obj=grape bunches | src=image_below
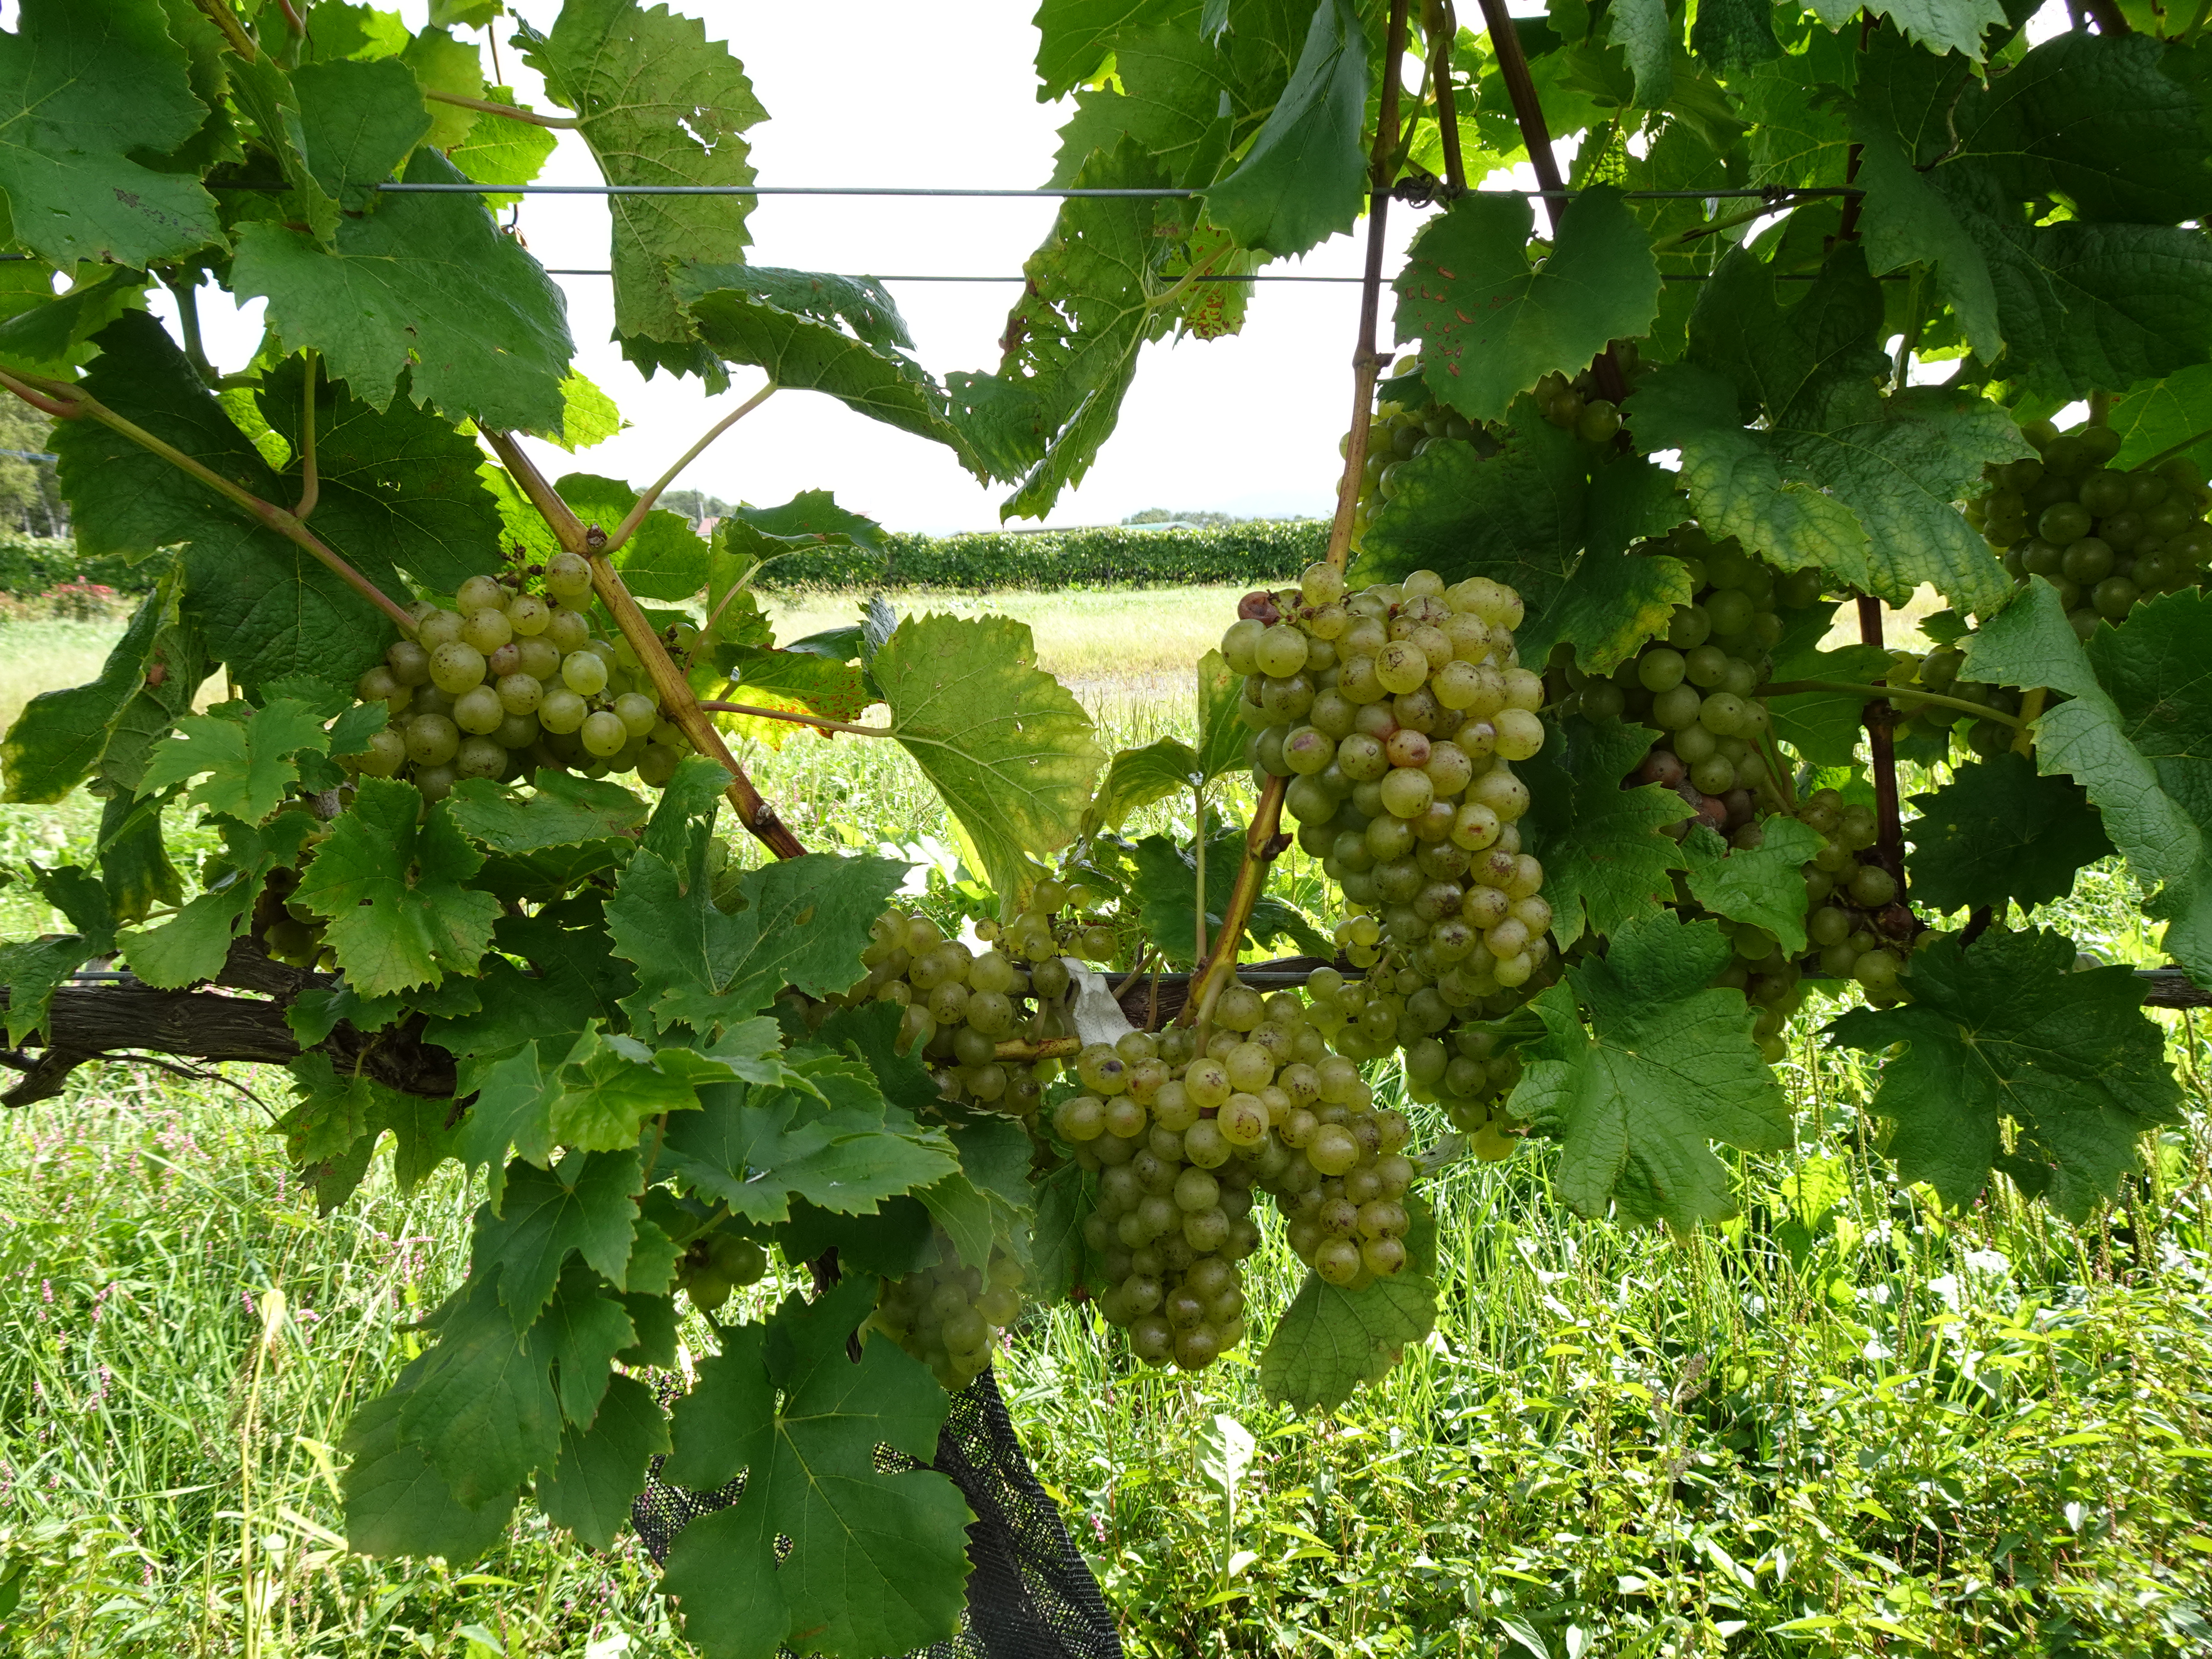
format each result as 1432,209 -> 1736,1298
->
1052,1030 -> 1260,1370
1960,421 -> 2212,645
1887,645 -> 2026,766
1735,788 -> 1957,1008
1626,745 -> 1765,906
329,600 -> 522,826
1557,643 -> 1675,745
772,909 -> 1064,1116
1543,921 -> 1610,968
1222,562 -> 1551,1006
975,878 -> 1120,997
1304,899 -> 1437,1063
1408,986 -> 1533,1162
417,551 -> 725,788
1182,986 -> 1415,1285
1694,909 -> 1800,1065
1337,354 -> 1500,553
219,800 -> 338,973
675,1231 -> 767,1311
839,1215 -> 1026,1388
1534,337 -> 1656,442
1628,522 -> 1822,797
